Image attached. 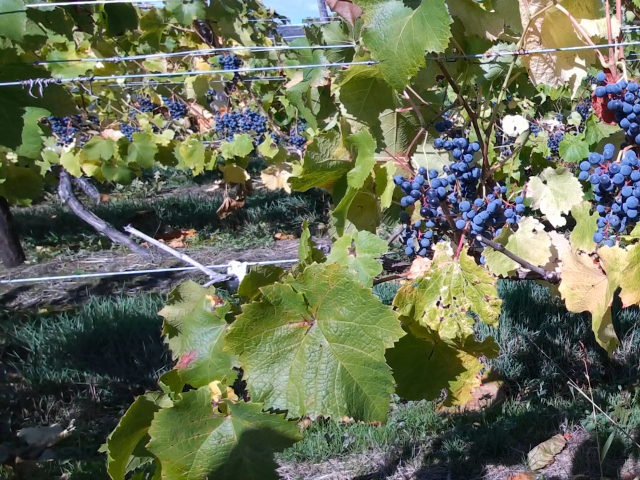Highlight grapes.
<instances>
[{
	"instance_id": "obj_1",
	"label": "grapes",
	"mask_w": 640,
	"mask_h": 480,
	"mask_svg": "<svg viewBox=\"0 0 640 480\" xmlns=\"http://www.w3.org/2000/svg\"><path fill=\"white\" fill-rule=\"evenodd\" d=\"M433 144L437 149L453 151V158L460 162H453L448 168L443 165L442 170L445 176H441L439 179H437L438 171L435 168L429 169L430 189L426 192L425 201L427 206L420 210L422 218H435L441 215V209L438 206L447 198L446 187L448 186V203L453 207H449L447 212L449 214L461 213V219L455 221V227L458 230L464 229L466 227L465 221L471 219L469 236L474 237L479 234L486 240H492L501 235L502 228H497L492 233L484 230L485 225L500 224L504 221L514 224L519 222L521 216L516 213L525 211V199L516 197L514 199L515 206L512 209L510 207L501 209L503 201L497 197V194L508 191L505 185L495 186L492 189V192L487 195L489 203H486V205L483 199H477L475 188L478 184V178L482 175V168L474 166L470 169L469 163L474 160L475 152L480 151L478 142L469 143L466 137H454L452 141L436 138L433 140ZM456 182L460 184V194L464 199L473 201L475 207H483L485 205V209H480L477 213L468 200L459 203V194L455 192Z\"/></svg>"
},
{
	"instance_id": "obj_2",
	"label": "grapes",
	"mask_w": 640,
	"mask_h": 480,
	"mask_svg": "<svg viewBox=\"0 0 640 480\" xmlns=\"http://www.w3.org/2000/svg\"><path fill=\"white\" fill-rule=\"evenodd\" d=\"M615 150L616 147L612 143H606L602 147V154L589 152L587 161L579 163L578 180L580 182L589 180V184L594 186L596 202L605 198L604 192H613L616 185L621 189L617 202L611 204V210L616 214L607 213L596 220V225L599 227L593 236L596 244H600L605 239L604 227L607 222L617 233H622L628 226V220L635 219L639 215L637 208L640 206V172L633 170V167H640V159L634 150H628L620 163L612 162L607 171L602 167H596L593 175L590 176L588 172L592 166L602 165L605 160H611Z\"/></svg>"
},
{
	"instance_id": "obj_3",
	"label": "grapes",
	"mask_w": 640,
	"mask_h": 480,
	"mask_svg": "<svg viewBox=\"0 0 640 480\" xmlns=\"http://www.w3.org/2000/svg\"><path fill=\"white\" fill-rule=\"evenodd\" d=\"M625 92L620 99H611L606 104L609 112H615V119L619 127L626 130L629 136H635V143L640 145V87L636 81H619L617 84H608L606 87L597 86L594 90L596 98H603L607 94L619 95Z\"/></svg>"
},
{
	"instance_id": "obj_4",
	"label": "grapes",
	"mask_w": 640,
	"mask_h": 480,
	"mask_svg": "<svg viewBox=\"0 0 640 480\" xmlns=\"http://www.w3.org/2000/svg\"><path fill=\"white\" fill-rule=\"evenodd\" d=\"M427 168L419 167L417 170V176L414 177L413 182L410 184L405 180L404 175H396L393 177V183L395 185H401V191L406 195L400 198V205L403 207H409L414 205L422 197V187H427Z\"/></svg>"
},
{
	"instance_id": "obj_5",
	"label": "grapes",
	"mask_w": 640,
	"mask_h": 480,
	"mask_svg": "<svg viewBox=\"0 0 640 480\" xmlns=\"http://www.w3.org/2000/svg\"><path fill=\"white\" fill-rule=\"evenodd\" d=\"M404 234L406 235V247L404 249V252L408 256H413L416 253V247L414 246L415 239L413 238V236H417L419 234V231L417 229L411 230L410 228H407L404 231Z\"/></svg>"
},
{
	"instance_id": "obj_6",
	"label": "grapes",
	"mask_w": 640,
	"mask_h": 480,
	"mask_svg": "<svg viewBox=\"0 0 640 480\" xmlns=\"http://www.w3.org/2000/svg\"><path fill=\"white\" fill-rule=\"evenodd\" d=\"M434 237V232L432 230H425L423 235L419 239V245L421 248L417 251L419 256H425L428 253V249L431 245V240Z\"/></svg>"
}]
</instances>
